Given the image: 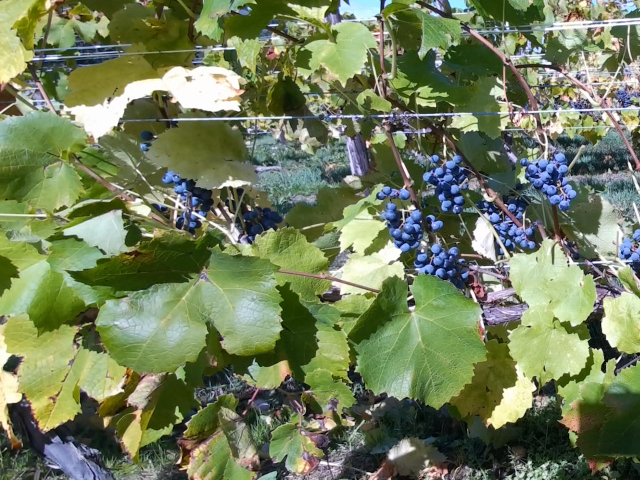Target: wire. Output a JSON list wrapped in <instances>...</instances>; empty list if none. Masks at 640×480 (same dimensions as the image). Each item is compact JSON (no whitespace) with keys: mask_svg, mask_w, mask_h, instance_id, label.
Masks as SVG:
<instances>
[{"mask_svg":"<svg viewBox=\"0 0 640 480\" xmlns=\"http://www.w3.org/2000/svg\"><path fill=\"white\" fill-rule=\"evenodd\" d=\"M130 41H118L106 44H74L65 47H34V52H67L76 49H108L120 46H130Z\"/></svg>","mask_w":640,"mask_h":480,"instance_id":"f0478fcc","label":"wire"},{"mask_svg":"<svg viewBox=\"0 0 640 480\" xmlns=\"http://www.w3.org/2000/svg\"><path fill=\"white\" fill-rule=\"evenodd\" d=\"M236 46L212 47V48H194V49H168V50H150L140 52H114V53H65L50 56H33V61H52L67 58H116V57H142L152 55H170V54H196V53H214L236 51Z\"/></svg>","mask_w":640,"mask_h":480,"instance_id":"4f2155b8","label":"wire"},{"mask_svg":"<svg viewBox=\"0 0 640 480\" xmlns=\"http://www.w3.org/2000/svg\"><path fill=\"white\" fill-rule=\"evenodd\" d=\"M640 111V106L632 107H599L592 109H553L547 108L537 111H506V110H475L462 113H348L332 115H302V116H227L218 118H185V117H160V118H121L119 124L124 123H162V122H183V123H220L229 121H304V120H334L351 118H377V119H400V118H464L477 115H504V116H539L545 114H594L601 112H634Z\"/></svg>","mask_w":640,"mask_h":480,"instance_id":"d2f4af69","label":"wire"},{"mask_svg":"<svg viewBox=\"0 0 640 480\" xmlns=\"http://www.w3.org/2000/svg\"><path fill=\"white\" fill-rule=\"evenodd\" d=\"M632 21H640V16L593 19L584 22H513L498 25H476L475 29L478 34H512L640 27V22Z\"/></svg>","mask_w":640,"mask_h":480,"instance_id":"a73af890","label":"wire"}]
</instances>
